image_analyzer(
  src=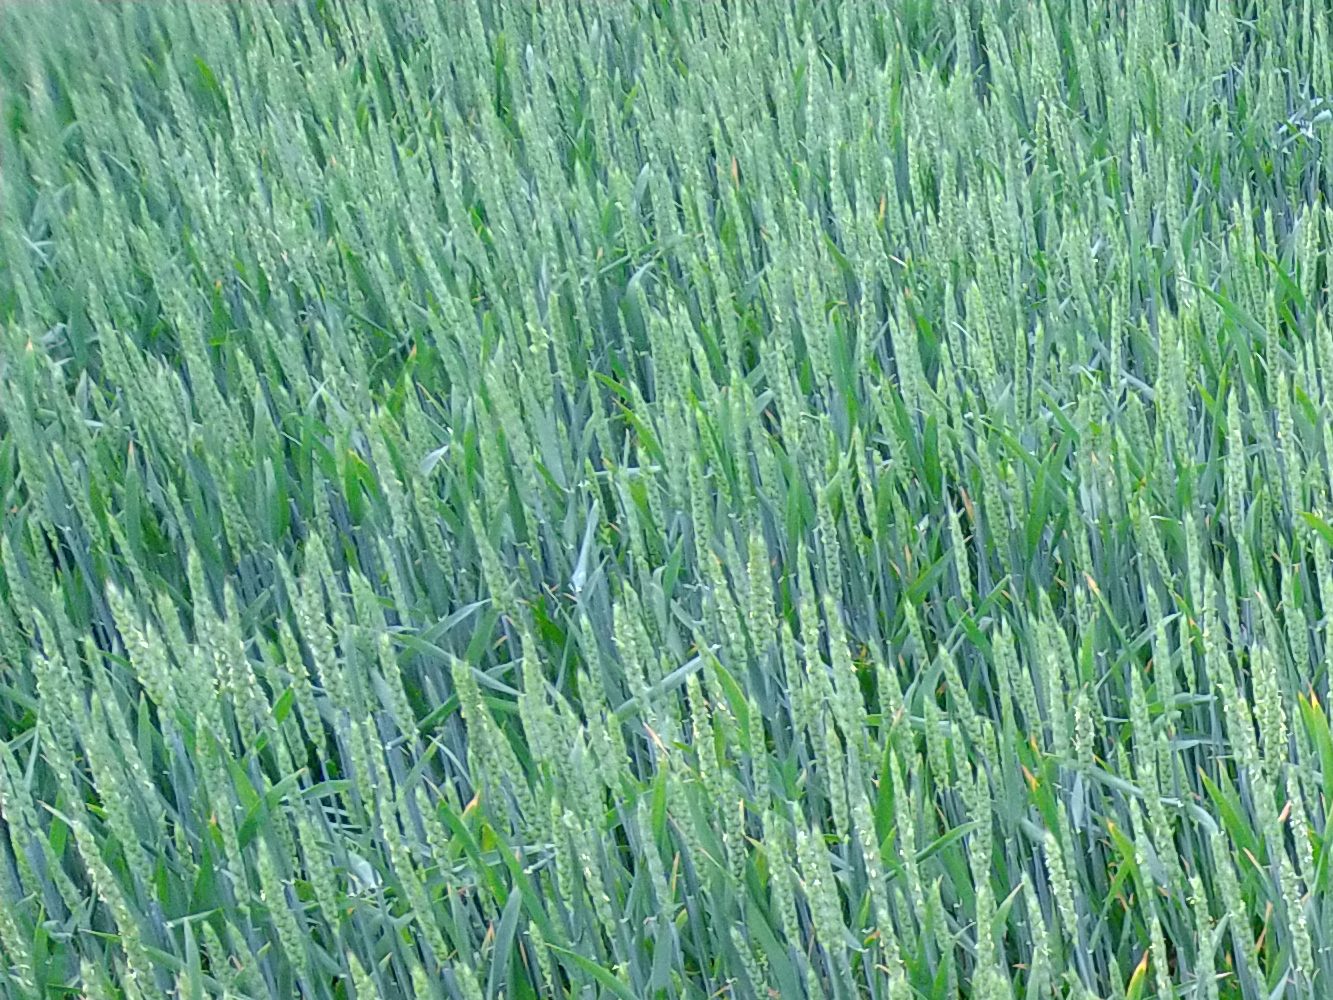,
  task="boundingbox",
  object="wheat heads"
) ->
[483,169,500,234]
[799,542,817,609]
[116,238,136,289]
[500,1,518,49]
[1203,568,1218,683]
[297,38,308,70]
[1004,115,1022,172]
[949,511,974,610]
[1076,404,1090,490]
[92,691,114,753]
[781,624,804,731]
[349,724,374,815]
[548,137,569,191]
[1216,652,1237,696]
[699,50,715,81]
[185,363,211,423]
[905,602,928,671]
[544,16,558,65]
[89,318,122,381]
[914,86,936,169]
[821,63,834,95]
[217,800,250,908]
[467,504,520,622]
[1157,313,1172,421]
[33,660,78,757]
[1308,341,1317,404]
[488,129,504,184]
[256,838,305,971]
[264,1,291,48]
[259,1,277,53]
[893,887,917,958]
[1082,529,1096,577]
[378,537,411,624]
[685,114,710,178]
[938,647,982,746]
[339,120,350,147]
[34,374,49,406]
[724,534,751,600]
[72,702,96,748]
[641,292,656,343]
[514,0,531,40]
[92,875,164,1000]
[840,208,861,266]
[686,43,698,74]
[1329,848,1333,938]
[1227,390,1246,500]
[714,274,739,364]
[1303,0,1312,69]
[1279,75,1289,119]
[94,432,114,470]
[813,834,845,951]
[345,0,367,55]
[38,834,78,910]
[810,276,832,372]
[1249,763,1280,849]
[287,55,314,113]
[1110,35,1118,72]
[224,72,251,155]
[967,181,986,256]
[698,190,720,261]
[1186,514,1202,617]
[310,535,350,628]
[201,204,234,277]
[1321,21,1331,92]
[607,713,632,790]
[553,418,576,487]
[1279,536,1290,578]
[400,142,437,225]
[1237,698,1258,773]
[320,136,334,168]
[484,371,541,503]
[1251,645,1266,745]
[188,551,217,650]
[362,148,376,190]
[1168,236,1188,305]
[616,967,646,1000]
[937,169,951,233]
[991,974,1023,1000]
[735,0,750,50]
[445,96,459,132]
[803,679,828,765]
[1057,800,1080,890]
[1117,430,1136,507]
[174,290,212,365]
[29,519,54,586]
[1114,227,1124,294]
[879,81,889,136]
[1211,213,1218,248]
[1241,181,1255,255]
[1152,420,1166,474]
[35,726,83,815]
[553,0,567,12]
[639,450,666,530]
[1094,160,1111,224]
[544,92,560,123]
[1061,355,1075,399]
[687,673,720,813]
[576,159,606,252]
[303,13,325,61]
[661,174,688,266]
[1139,502,1173,587]
[465,138,490,188]
[403,62,422,118]
[89,288,109,328]
[1067,487,1082,568]
[815,487,841,597]
[106,513,152,604]
[96,246,135,330]
[1048,875,1079,941]
[1124,65,1143,126]
[104,586,165,706]
[1147,589,1161,642]
[1042,833,1077,939]
[526,0,537,10]
[755,31,775,81]
[522,119,556,206]
[1202,938,1221,1000]
[1235,35,1243,57]
[296,113,307,143]
[1286,767,1313,882]
[22,540,41,583]
[195,141,215,206]
[853,181,868,244]
[371,18,395,68]
[406,409,431,462]
[667,291,689,367]
[395,0,418,32]
[228,924,274,1000]
[765,349,784,417]
[190,237,219,284]
[191,654,231,748]
[279,749,308,829]
[1050,358,1059,390]
[1261,488,1273,565]
[764,199,777,238]
[1171,89,1181,138]
[856,0,874,37]
[1130,394,1140,455]
[1047,655,1068,758]
[1044,34,1059,81]
[1204,298,1224,369]
[976,766,993,869]
[86,635,166,826]
[828,133,838,212]
[1212,832,1255,966]
[1109,81,1124,162]
[425,0,445,34]
[729,385,753,505]
[1202,55,1210,128]
[122,964,168,1000]
[697,74,717,128]
[295,366,318,414]
[590,376,614,467]
[425,309,469,395]
[339,217,367,258]
[99,775,155,894]
[103,328,143,407]
[1256,2,1265,33]
[955,10,967,77]
[1276,0,1286,22]
[783,202,797,242]
[270,118,304,201]
[1183,313,1200,390]
[1269,12,1276,47]
[821,419,837,480]
[638,802,671,914]
[1323,123,1333,167]
[992,26,1015,87]
[1246,49,1255,116]
[29,604,66,667]
[1265,205,1274,260]
[866,220,893,285]
[711,129,735,186]
[536,856,553,897]
[208,458,247,550]
[487,725,546,842]
[1022,178,1037,252]
[460,31,478,71]
[224,635,258,747]
[853,104,861,163]
[1045,279,1066,351]
[335,0,354,59]
[1229,477,1243,536]
[1008,18,1018,66]
[325,238,349,297]
[793,275,827,386]
[262,123,281,176]
[366,718,393,799]
[1155,144,1164,196]
[764,815,799,944]
[1295,707,1321,817]
[1153,620,1174,703]
[223,582,242,635]
[1294,334,1302,379]
[1289,38,1297,90]
[694,260,713,327]
[302,140,331,206]
[218,150,231,195]
[1015,258,1022,327]
[50,363,80,448]
[154,367,179,432]
[1216,0,1232,59]
[1076,697,1092,776]
[377,257,407,334]
[250,0,268,38]
[1015,329,1027,420]
[722,240,737,290]
[360,201,382,256]
[633,109,663,171]
[982,719,1004,795]
[192,0,218,32]
[1276,374,1291,466]
[977,439,1011,571]
[1111,297,1122,394]
[239,352,277,442]
[990,99,1004,161]
[1133,137,1146,220]
[728,189,755,276]
[1277,876,1314,978]
[796,835,830,947]
[196,719,226,814]
[1077,588,1089,637]
[582,242,602,314]
[72,824,140,946]
[0,907,48,1000]
[857,28,866,56]
[1,538,34,633]
[157,596,193,669]
[377,804,450,964]
[168,55,202,146]
[565,0,578,11]
[250,674,292,764]
[885,158,902,240]
[1099,44,1114,95]
[28,453,47,480]
[961,138,979,188]
[827,603,862,725]
[852,800,895,952]
[1247,384,1277,500]
[1328,208,1333,252]
[0,603,25,672]
[431,93,441,136]
[625,24,633,87]
[381,117,405,201]
[382,410,419,478]
[327,30,344,97]
[663,324,692,401]
[929,214,947,270]
[645,37,659,78]
[1029,101,1045,176]
[1129,666,1155,769]
[969,287,996,377]
[273,178,291,232]
[1042,1,1054,43]
[1006,464,1023,514]
[419,141,435,199]
[435,35,460,96]
[838,6,850,74]
[493,179,515,236]
[264,322,296,382]
[1221,554,1240,652]
[1110,957,1125,1000]
[308,229,338,298]
[1239,537,1257,596]
[411,229,459,329]
[1314,32,1320,88]
[546,898,568,938]
[381,254,395,282]
[339,250,363,307]
[669,66,682,96]
[231,400,249,438]
[237,76,259,138]
[1030,6,1039,103]
[79,963,140,1000]
[388,0,402,37]
[223,484,257,548]
[1072,0,1086,39]
[1288,451,1299,525]
[313,460,334,550]
[214,132,222,219]
[930,881,952,956]
[855,429,874,528]
[567,261,592,341]
[1021,73,1034,126]
[1173,1,1183,41]
[799,205,815,258]
[622,203,638,254]
[1000,629,1022,713]
[454,70,470,111]
[355,344,375,411]
[592,92,610,159]
[876,142,887,182]
[454,666,492,763]
[210,15,226,74]
[1167,49,1175,72]
[1161,75,1173,134]
[731,134,754,187]
[1269,73,1279,119]
[1147,129,1154,193]
[138,231,178,316]
[1206,16,1216,76]
[466,0,490,72]
[467,60,484,114]
[864,139,883,201]
[256,328,277,379]
[772,273,790,349]
[942,347,961,430]
[854,46,863,93]
[76,220,105,296]
[1191,84,1199,130]
[660,47,670,109]
[1254,90,1272,119]
[866,876,901,972]
[1111,1,1116,31]
[1163,159,1179,236]
[19,453,54,541]
[440,195,491,269]
[1170,413,1191,466]
[1246,248,1264,321]
[347,955,401,1000]
[907,208,925,260]
[1175,27,1189,98]
[771,148,799,200]
[652,176,674,260]
[554,66,575,129]
[558,14,577,95]
[178,317,197,357]
[1102,471,1125,535]
[1021,32,1031,89]
[1323,251,1333,334]
[79,425,111,501]
[1077,43,1099,123]
[584,465,607,523]
[550,295,576,397]
[1226,1,1242,53]
[1189,876,1212,947]
[349,572,382,654]
[1203,132,1212,171]
[280,624,325,749]
[510,242,536,309]
[166,88,184,129]
[749,537,776,654]
[1138,875,1157,937]
[1284,576,1311,679]
[794,803,809,856]
[1324,423,1332,471]
[714,80,726,116]
[802,609,821,695]
[1130,798,1156,913]
[1192,31,1204,74]
[368,72,381,122]
[282,701,306,763]
[226,211,259,290]
[833,69,847,138]
[416,788,454,875]
[453,212,476,280]
[52,588,83,681]
[406,377,429,450]
[619,480,647,573]
[845,739,864,810]
[26,382,46,426]
[327,126,345,161]
[517,469,542,557]
[718,0,728,34]
[749,60,763,107]
[522,634,552,763]
[395,787,421,853]
[241,208,288,303]
[512,307,533,376]
[186,154,214,227]
[679,308,718,398]
[89,75,112,142]
[1132,0,1146,61]
[556,198,570,249]
[5,241,40,329]
[522,297,554,404]
[909,140,923,215]
[1151,60,1164,124]
[11,384,28,430]
[121,339,168,415]
[458,275,480,342]
[1158,731,1174,797]
[1253,967,1282,1000]
[666,778,711,887]
[57,675,72,716]
[1151,921,1176,1000]
[1327,618,1333,746]
[580,615,606,702]
[1141,0,1156,47]
[218,13,249,75]
[826,727,849,836]
[526,46,537,113]
[1265,683,1282,778]
[696,411,730,499]
[0,741,44,833]
[264,780,297,871]
[540,0,552,12]
[730,927,770,1000]
[161,126,194,209]
[749,699,770,808]
[806,967,827,1000]
[973,887,994,1000]
[1068,239,1097,330]
[82,93,101,138]
[709,555,748,671]
[1044,74,1062,118]
[780,40,788,86]
[582,0,594,38]
[9,819,48,893]
[1312,537,1333,614]
[139,199,154,246]
[400,244,419,301]
[476,399,508,510]
[701,656,744,758]
[988,176,1008,293]
[721,771,746,883]
[53,445,102,548]
[1003,169,1025,249]
[531,189,542,227]
[1317,313,1333,411]
[379,636,417,742]
[1270,0,1286,43]
[612,606,648,716]
[411,968,462,1000]
[1234,200,1242,237]
[413,482,454,582]
[1020,669,1044,751]
[612,101,634,176]
[479,78,497,117]
[69,89,100,146]
[580,875,620,944]
[1064,127,1075,222]
[299,819,339,928]
[1140,770,1183,892]
[900,819,923,923]
[505,179,534,236]
[413,0,435,35]
[123,86,146,126]
[950,724,976,814]
[754,131,771,189]
[1266,307,1279,396]
[279,576,345,702]
[434,124,458,194]
[681,76,688,112]
[669,0,684,35]
[356,134,367,198]
[703,1,720,40]
[600,2,619,47]
[942,285,961,359]
[107,741,140,812]
[785,16,804,68]
[689,457,712,578]
[1089,1,1099,29]
[1229,236,1245,310]
[387,70,408,125]
[249,164,271,229]
[314,322,351,409]
[840,469,863,545]
[193,360,239,446]
[120,109,146,173]
[446,0,462,60]
[973,113,997,169]
[778,101,797,160]
[527,922,553,991]
[267,73,288,132]
[325,182,367,252]
[619,304,633,370]
[877,391,913,483]
[676,187,707,258]
[509,59,530,123]
[1152,0,1163,49]
[1302,218,1315,301]
[649,317,672,408]
[1221,101,1230,166]
[1074,142,1093,214]
[1116,740,1130,788]
[544,220,557,282]
[689,74,698,114]
[611,0,625,38]
[174,373,189,415]
[857,264,875,363]
[0,763,27,826]
[1257,590,1284,667]
[763,450,788,531]
[1031,321,1047,418]
[1139,403,1154,465]
[279,226,308,278]
[629,612,655,679]
[456,964,504,1000]
[1146,256,1159,302]
[506,154,521,186]
[670,122,685,172]
[543,712,589,817]
[880,667,916,767]
[1087,27,1100,85]
[1041,591,1079,690]
[692,18,704,57]
[312,51,324,93]
[432,48,446,92]
[924,696,948,786]
[539,62,549,129]
[563,811,616,934]
[91,152,130,250]
[718,63,728,98]
[88,384,128,469]
[294,204,306,246]
[802,53,816,155]
[167,484,195,549]
[934,371,950,474]
[142,122,174,203]
[201,923,236,993]
[775,351,798,441]
[633,385,650,432]
[551,802,576,905]
[276,60,293,109]
[370,119,381,167]
[202,234,221,284]
[896,295,926,398]
[1050,111,1063,182]
[1259,71,1271,140]
[890,754,913,854]
[1023,873,1055,999]
[1045,200,1059,263]
[979,14,1000,74]
[597,37,609,86]
[1181,616,1194,677]
[951,202,967,245]
[11,233,59,320]
[1081,240,1097,297]
[641,70,660,113]
[366,420,410,535]
[814,211,829,256]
